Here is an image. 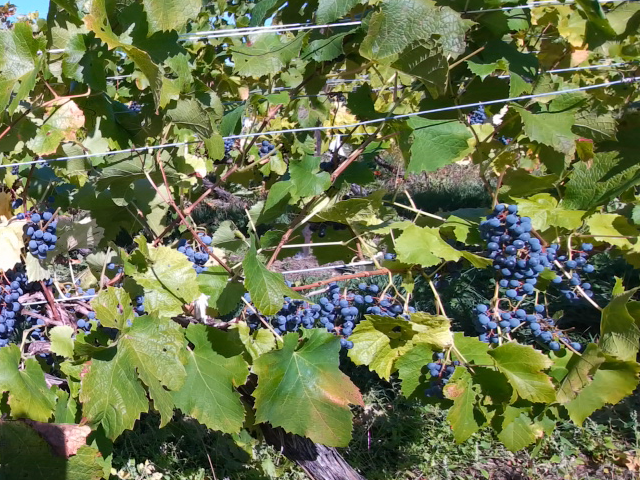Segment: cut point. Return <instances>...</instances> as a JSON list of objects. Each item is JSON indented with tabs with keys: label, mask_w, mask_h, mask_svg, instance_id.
<instances>
[{
	"label": "cut point",
	"mask_w": 640,
	"mask_h": 480,
	"mask_svg": "<svg viewBox=\"0 0 640 480\" xmlns=\"http://www.w3.org/2000/svg\"><path fill=\"white\" fill-rule=\"evenodd\" d=\"M389 275H390V281H389L388 285L386 286V288L384 289V293H387V292H388V290L391 288V286H392V288L394 289V291H396V292H400V289H399V288H397V286L395 285V283H393V274H389Z\"/></svg>",
	"instance_id": "obj_1"
},
{
	"label": "cut point",
	"mask_w": 640,
	"mask_h": 480,
	"mask_svg": "<svg viewBox=\"0 0 640 480\" xmlns=\"http://www.w3.org/2000/svg\"><path fill=\"white\" fill-rule=\"evenodd\" d=\"M187 216H188V218L190 219V221L192 222L193 227H194V228H197V224H196V222H195V219L193 218V216L191 215V213H190V212L187 214Z\"/></svg>",
	"instance_id": "obj_2"
}]
</instances>
